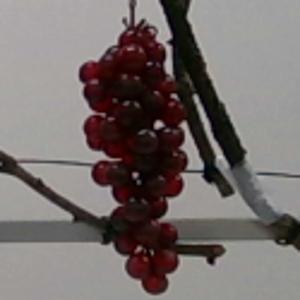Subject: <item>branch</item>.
<instances>
[{
  "instance_id": "2",
  "label": "branch",
  "mask_w": 300,
  "mask_h": 300,
  "mask_svg": "<svg viewBox=\"0 0 300 300\" xmlns=\"http://www.w3.org/2000/svg\"><path fill=\"white\" fill-rule=\"evenodd\" d=\"M0 174L17 179L43 199L64 210L72 217L73 224H85L93 229L101 236L100 244L102 246L113 244V238L116 233L109 227V215L97 216L72 200L60 195L48 186L42 178L35 176L32 172L22 167L14 156L9 155L1 148Z\"/></svg>"
},
{
  "instance_id": "3",
  "label": "branch",
  "mask_w": 300,
  "mask_h": 300,
  "mask_svg": "<svg viewBox=\"0 0 300 300\" xmlns=\"http://www.w3.org/2000/svg\"><path fill=\"white\" fill-rule=\"evenodd\" d=\"M180 256L205 258L206 264L215 267L217 259L224 256L228 250L223 244H186L176 243L173 248Z\"/></svg>"
},
{
  "instance_id": "1",
  "label": "branch",
  "mask_w": 300,
  "mask_h": 300,
  "mask_svg": "<svg viewBox=\"0 0 300 300\" xmlns=\"http://www.w3.org/2000/svg\"><path fill=\"white\" fill-rule=\"evenodd\" d=\"M170 38L171 91L188 109L184 124L202 164L200 178L220 200L238 195L273 236L275 245L300 254V219L276 206L261 188L226 104L217 93L188 13L194 0H157ZM195 95H196L197 98H198V101H199V104H200V107H201V109H202L203 115L205 116L207 122H208V124H209L210 133H211V135H212V137H213V139H214V141H215V143H216V145L218 146L220 152H221V154L218 155V156H217V151L215 150L214 147H213V144L211 143V140H210V138H209L208 132H207V129L205 128V122H204V120H203V118H202L200 109H199V107H198V103H197V101H196V98H195Z\"/></svg>"
}]
</instances>
